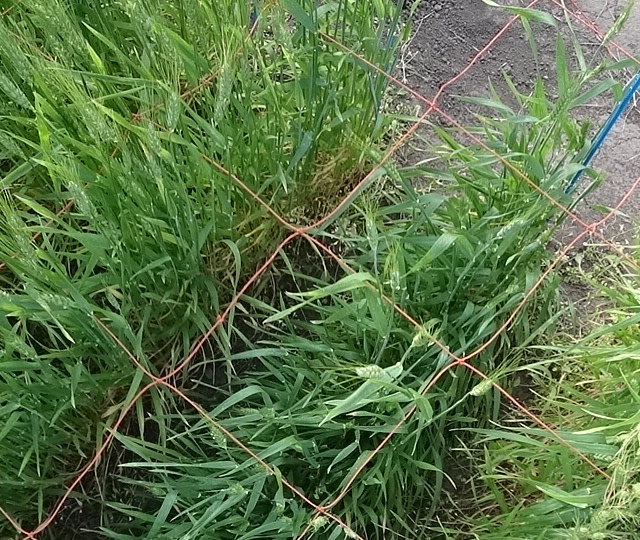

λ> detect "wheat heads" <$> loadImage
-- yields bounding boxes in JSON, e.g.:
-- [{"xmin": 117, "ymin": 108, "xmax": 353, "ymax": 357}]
[
  {"xmin": 0, "ymin": 75, "xmax": 31, "ymax": 105},
  {"xmin": 147, "ymin": 121, "xmax": 161, "ymax": 155},
  {"xmin": 66, "ymin": 181, "xmax": 90, "ymax": 214},
  {"xmin": 491, "ymin": 219, "xmax": 529, "ymax": 236},
  {"xmin": 146, "ymin": 156, "xmax": 160, "ymax": 178},
  {"xmin": 369, "ymin": 151, "xmax": 401, "ymax": 182},
  {"xmin": 13, "ymin": 234, "xmax": 35, "ymax": 263},
  {"xmin": 132, "ymin": 183, "xmax": 143, "ymax": 193},
  {"xmin": 41, "ymin": 0, "xmax": 82, "ymax": 46},
  {"xmin": 0, "ymin": 134, "xmax": 25, "ymax": 158},
  {"xmin": 413, "ymin": 326, "xmax": 430, "ymax": 348},
  {"xmin": 355, "ymin": 363, "xmax": 380, "ymax": 378},
  {"xmin": 139, "ymin": 217, "xmax": 155, "ymax": 235},
  {"xmin": 8, "ymin": 212, "xmax": 23, "ymax": 231},
  {"xmin": 183, "ymin": 1, "xmax": 200, "ymax": 35},
  {"xmin": 7, "ymin": 331, "xmax": 35, "ymax": 357},
  {"xmin": 277, "ymin": 26, "xmax": 293, "ymax": 51},
  {"xmin": 2, "ymin": 37, "xmax": 31, "ymax": 74},
  {"xmin": 589, "ymin": 508, "xmax": 610, "ymax": 529},
  {"xmin": 216, "ymin": 63, "xmax": 235, "ymax": 98},
  {"xmin": 220, "ymin": 482, "xmax": 244, "ymax": 496},
  {"xmin": 120, "ymin": 149, "xmax": 132, "ymax": 169},
  {"xmin": 548, "ymin": 87, "xmax": 573, "ymax": 124},
  {"xmin": 212, "ymin": 101, "xmax": 226, "ymax": 124},
  {"xmin": 45, "ymin": 289, "xmax": 78, "ymax": 314},
  {"xmin": 84, "ymin": 109, "xmax": 109, "ymax": 135},
  {"xmin": 312, "ymin": 513, "xmax": 328, "ymax": 529},
  {"xmin": 205, "ymin": 426, "xmax": 228, "ymax": 449},
  {"xmin": 362, "ymin": 218, "xmax": 378, "ymax": 246},
  {"xmin": 166, "ymin": 94, "xmax": 180, "ymax": 128},
  {"xmin": 474, "ymin": 381, "xmax": 495, "ymax": 394},
  {"xmin": 156, "ymin": 27, "xmax": 176, "ymax": 61},
  {"xmin": 108, "ymin": 290, "xmax": 121, "ymax": 309},
  {"xmin": 390, "ymin": 270, "xmax": 403, "ymax": 290}
]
